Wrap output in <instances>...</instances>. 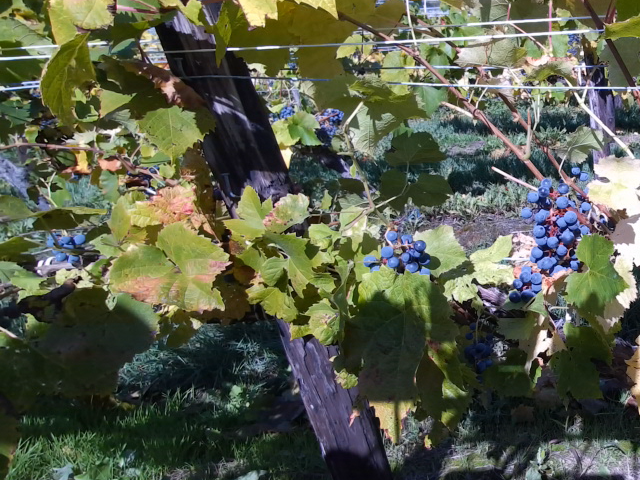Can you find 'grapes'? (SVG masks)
<instances>
[{
  "label": "grapes",
  "mask_w": 640,
  "mask_h": 480,
  "mask_svg": "<svg viewBox=\"0 0 640 480\" xmlns=\"http://www.w3.org/2000/svg\"><path fill=\"white\" fill-rule=\"evenodd\" d=\"M551 186L550 178L542 179L537 192L528 193L526 201L541 205L539 211L534 214L535 224L532 228V236L537 246L531 248L530 262L537 265L539 270H545L550 276H554L556 272H567L569 268L572 271L580 269L581 261L576 255L569 257V266L557 265V262L562 261L567 254V244H571L580 234L588 236L590 229L581 225L576 216L566 211L555 217L556 236H549L550 225L545 222V219L550 216L551 211Z\"/></svg>",
  "instance_id": "01657485"
},
{
  "label": "grapes",
  "mask_w": 640,
  "mask_h": 480,
  "mask_svg": "<svg viewBox=\"0 0 640 480\" xmlns=\"http://www.w3.org/2000/svg\"><path fill=\"white\" fill-rule=\"evenodd\" d=\"M402 245L411 244V247L405 250V253L400 255V258L395 255V249L390 245H385L379 249V256L386 260V265L389 268H397L401 261L404 267L411 273L417 271L418 275L428 276L431 274V270L428 268H420L432 263L430 254L426 252L427 243L424 240H415L410 234H402L399 238Z\"/></svg>",
  "instance_id": "b958b902"
},
{
  "label": "grapes",
  "mask_w": 640,
  "mask_h": 480,
  "mask_svg": "<svg viewBox=\"0 0 640 480\" xmlns=\"http://www.w3.org/2000/svg\"><path fill=\"white\" fill-rule=\"evenodd\" d=\"M524 283H531V289L511 291L509 293V301L511 303H527L540 293L543 287L542 274L538 271H531L529 265H524L519 273V279L513 281L515 289H521Z\"/></svg>",
  "instance_id": "0513c4c2"
},
{
  "label": "grapes",
  "mask_w": 640,
  "mask_h": 480,
  "mask_svg": "<svg viewBox=\"0 0 640 480\" xmlns=\"http://www.w3.org/2000/svg\"><path fill=\"white\" fill-rule=\"evenodd\" d=\"M57 243L60 248L74 249L76 245L85 244L86 237L84 234L61 237L60 233L55 232H52L51 235L46 237V245L48 247L54 248Z\"/></svg>",
  "instance_id": "84f90ec7"
},
{
  "label": "grapes",
  "mask_w": 640,
  "mask_h": 480,
  "mask_svg": "<svg viewBox=\"0 0 640 480\" xmlns=\"http://www.w3.org/2000/svg\"><path fill=\"white\" fill-rule=\"evenodd\" d=\"M557 191L560 195L555 199V205L559 209H566L568 205L576 207V202L568 198L570 195V186L566 182H559L557 184Z\"/></svg>",
  "instance_id": "f8a65327"
},
{
  "label": "grapes",
  "mask_w": 640,
  "mask_h": 480,
  "mask_svg": "<svg viewBox=\"0 0 640 480\" xmlns=\"http://www.w3.org/2000/svg\"><path fill=\"white\" fill-rule=\"evenodd\" d=\"M52 254L55 255L58 262L66 261L68 264H77L79 262V257L74 254L69 255L67 252H61L60 250H53Z\"/></svg>",
  "instance_id": "5460f4e3"
}]
</instances>
